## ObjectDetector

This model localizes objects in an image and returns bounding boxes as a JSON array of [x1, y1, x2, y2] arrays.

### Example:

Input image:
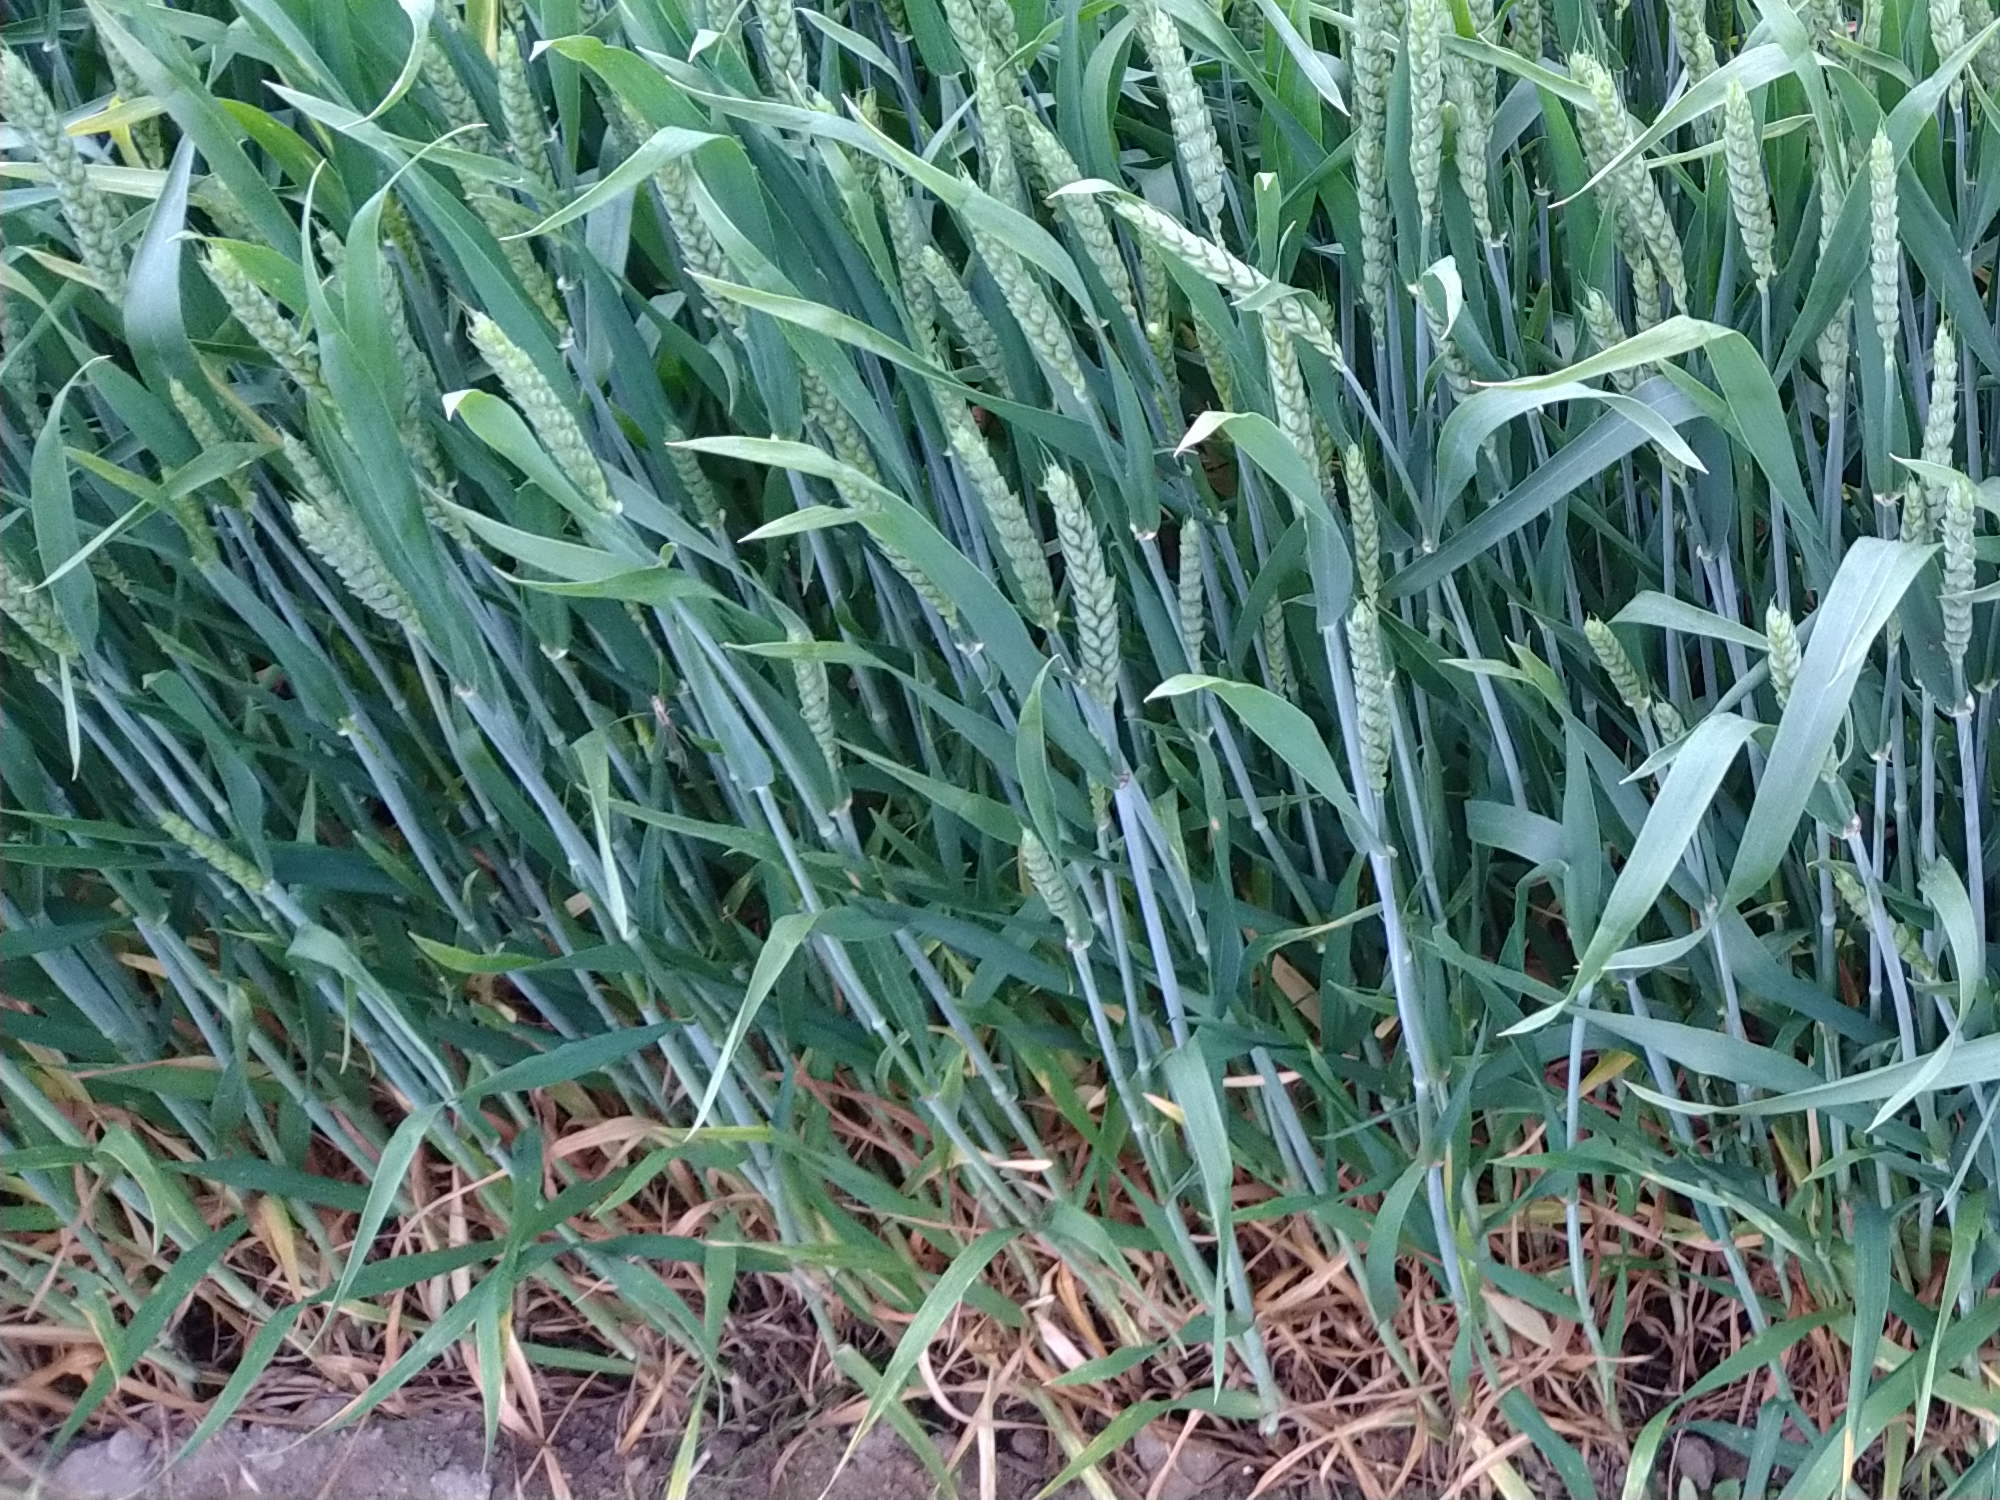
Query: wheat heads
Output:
[[1047, 478, 1121, 704], [1142, 233, 1169, 328], [468, 319, 616, 513], [629, 111, 747, 329], [1000, 78, 1051, 192], [1264, 595, 1288, 693], [378, 256, 460, 529], [1871, 132, 1900, 348], [458, 177, 576, 337], [1458, 70, 1491, 238], [1633, 252, 1663, 378], [1508, 0, 1541, 60], [1347, 605, 1393, 787], [1588, 293, 1639, 393], [968, 229, 1093, 394], [733, 0, 809, 100], [1942, 477, 1976, 657], [931, 384, 1058, 622], [698, 0, 739, 47], [1579, 62, 1687, 289], [280, 437, 420, 624], [1654, 702, 1689, 752], [1717, 0, 1733, 51], [1662, 0, 1698, 65], [333, 240, 445, 398], [1629, 249, 1689, 300], [1346, 445, 1380, 600], [161, 812, 263, 890], [1583, 618, 1643, 707], [1419, 289, 1477, 402], [414, 478, 478, 547], [1073, 249, 1135, 321], [976, 63, 1022, 206], [1263, 315, 1318, 479], [496, 32, 558, 215], [0, 56, 131, 304], [319, 229, 352, 295], [1818, 299, 1850, 411], [1788, 0, 1847, 52], [1694, 32, 1723, 140], [1147, 325, 1183, 442], [99, 477, 221, 564], [168, 379, 253, 495], [0, 618, 70, 689], [880, 167, 937, 353], [1353, 0, 1386, 133], [1024, 116, 1138, 321], [1145, 248, 1343, 364], [932, 0, 1021, 164], [536, 477, 620, 520], [1180, 520, 1204, 660], [1539, 0, 1563, 56], [1, 284, 45, 437], [1311, 403, 1334, 499], [406, 424, 467, 539], [0, 546, 77, 651], [1020, 831, 1073, 918], [1193, 305, 1238, 410], [577, 0, 602, 33], [1574, 94, 1612, 208], [788, 630, 839, 767], [906, 0, 1028, 66], [1410, 0, 1442, 215], [1089, 772, 1109, 827], [82, 539, 140, 601], [1921, 321, 1958, 521], [197, 253, 350, 422], [665, 428, 721, 525], [1232, 0, 1266, 51], [1903, 477, 1971, 544], [381, 193, 426, 284], [420, 39, 488, 156], [491, 0, 526, 27], [1465, 0, 1496, 40], [799, 359, 883, 501], [1819, 160, 1840, 261], [1862, 0, 1884, 79], [1831, 869, 1937, 982], [853, 93, 882, 190], [1724, 82, 1775, 275], [77, 0, 164, 165], [1361, 249, 1394, 337], [1150, 9, 1228, 235], [1768, 609, 1802, 704], [922, 249, 1011, 399], [1957, 0, 2000, 83], [825, 480, 962, 630]]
